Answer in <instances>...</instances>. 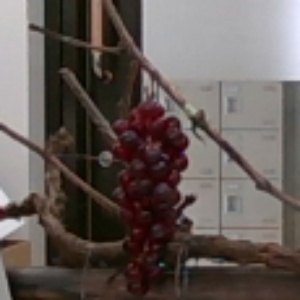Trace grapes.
<instances>
[{"instance_id": "grapes-1", "label": "grapes", "mask_w": 300, "mask_h": 300, "mask_svg": "<svg viewBox=\"0 0 300 300\" xmlns=\"http://www.w3.org/2000/svg\"><path fill=\"white\" fill-rule=\"evenodd\" d=\"M134 120L116 119L114 130L119 143L112 153L128 162L129 170L118 180L128 195L118 199L120 219L129 232L124 252L134 257L129 261L131 290L142 291V284L156 283L159 272L154 264L162 253V242L175 234L177 213L174 206L182 199L176 185L180 173L188 166L184 155L190 150L189 137L182 119L170 116L155 123L166 108L158 101H146L132 109Z\"/></svg>"}]
</instances>
